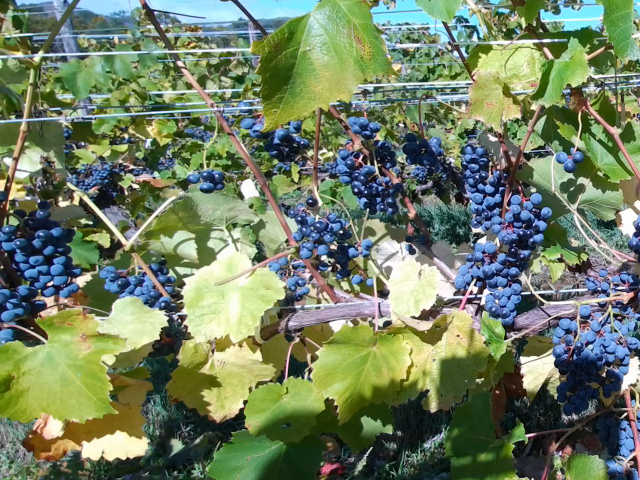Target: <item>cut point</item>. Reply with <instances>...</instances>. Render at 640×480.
<instances>
[{
  "instance_id": "6a23745f",
  "label": "cut point",
  "mask_w": 640,
  "mask_h": 480,
  "mask_svg": "<svg viewBox=\"0 0 640 480\" xmlns=\"http://www.w3.org/2000/svg\"><path fill=\"white\" fill-rule=\"evenodd\" d=\"M218 123L219 121L217 120V118H214L213 121V134L209 140V143L207 144L206 148L204 149V152L202 153L201 159L205 160L212 148V146L214 145V142L216 141V138L218 136Z\"/></svg>"
},
{
  "instance_id": "7d7e1d6f",
  "label": "cut point",
  "mask_w": 640,
  "mask_h": 480,
  "mask_svg": "<svg viewBox=\"0 0 640 480\" xmlns=\"http://www.w3.org/2000/svg\"><path fill=\"white\" fill-rule=\"evenodd\" d=\"M585 109L583 108V106H581L576 114V124H577V129L576 132L580 133L582 131V121H581V116L584 113Z\"/></svg>"
},
{
  "instance_id": "deb38ca7",
  "label": "cut point",
  "mask_w": 640,
  "mask_h": 480,
  "mask_svg": "<svg viewBox=\"0 0 640 480\" xmlns=\"http://www.w3.org/2000/svg\"><path fill=\"white\" fill-rule=\"evenodd\" d=\"M312 191H313V194L315 195V197H316V199L318 201V204L322 205L323 204V200H322V197H321L320 192L318 191L317 187H314L312 185Z\"/></svg>"
}]
</instances>
